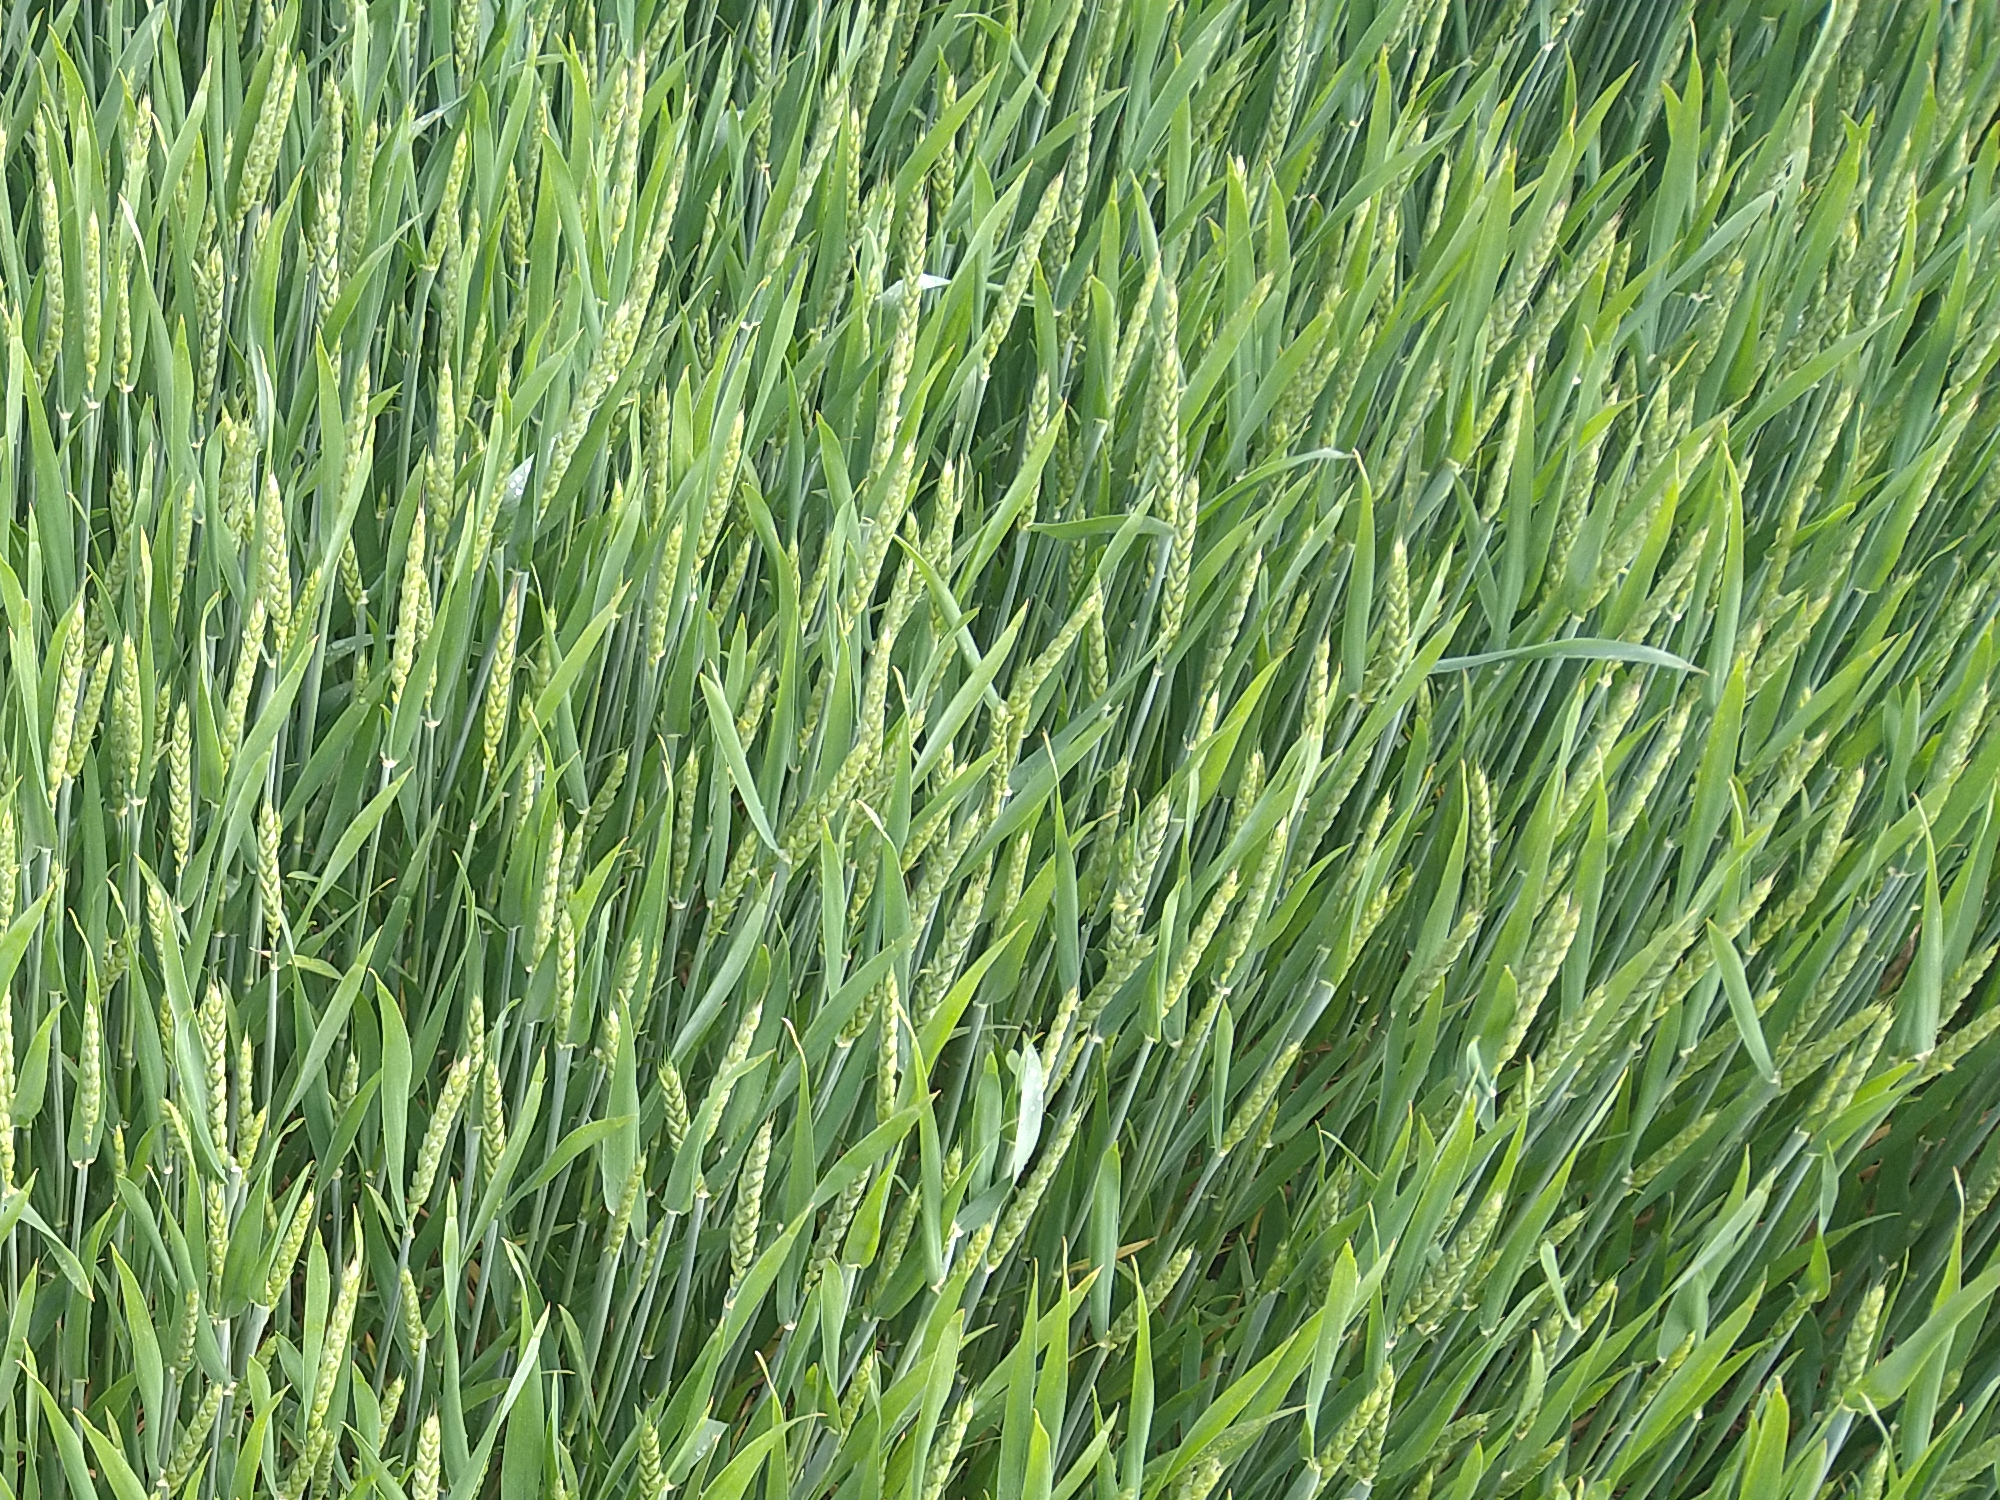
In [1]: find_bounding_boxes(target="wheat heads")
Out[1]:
[388,504,428,709]
[1061,497,1086,617]
[1091,762,1133,901]
[240,1112,272,1170]
[632,1210,670,1280]
[167,702,192,871]
[807,1156,874,1284]
[202,1166,219,1297]
[788,737,879,871]
[645,381,670,517]
[603,1007,622,1087]
[1207,819,1289,985]
[1425,158,1447,242]
[1347,1364,1392,1484]
[256,1189,276,1226]
[104,462,137,570]
[1543,1294,1562,1363]
[257,1,280,61]
[155,991,180,1074]
[1350,885,1389,957]
[1550,0,1582,35]
[695,1003,760,1138]
[1853,363,1925,479]
[1768,1281,1818,1347]
[832,1350,880,1445]
[338,365,368,500]
[1369,207,1398,323]
[1226,1042,1303,1144]
[163,477,197,622]
[635,1408,657,1500]
[1756,480,1807,602]
[0,1014,15,1173]
[0,708,11,778]
[1755,590,1801,631]
[876,333,910,474]
[1885,0,1931,64]
[841,112,860,248]
[430,368,460,546]
[0,804,16,926]
[1531,451,1597,604]
[797,535,840,632]
[79,1006,101,1144]
[1915,1433,2000,1500]
[1859,178,1916,321]
[657,1061,692,1154]
[1502,281,1556,381]
[1264,334,1322,424]
[198,241,227,405]
[1475,371,1526,450]
[844,445,912,628]
[469,469,505,564]
[964,31,984,158]
[918,473,955,634]
[1807,68,1861,184]
[1940,313,2000,414]
[128,94,152,165]
[1398,1190,1506,1324]
[641,526,681,658]
[590,70,623,172]
[646,0,680,69]
[1190,63,1237,140]
[1108,1243,1194,1351]
[1711,526,1730,604]
[1826,1013,1895,1122]
[1688,990,1777,1077]
[1465,1216,1581,1309]
[909,635,958,737]
[1660,570,1700,616]
[1153,346,1181,525]
[776,80,845,262]
[1489,198,1566,351]
[521,698,537,830]
[1502,897,1573,1012]
[67,646,115,772]
[1958,151,1970,218]
[175,154,199,221]
[314,1258,350,1418]
[1919,685,1989,804]
[1606,240,1632,303]
[994,1108,1080,1271]
[419,568,440,692]
[1801,393,1852,509]
[1110,793,1170,956]
[229,1,250,37]
[534,634,554,696]
[1410,680,1439,752]
[1036,987,1074,1074]
[1514,984,1603,1114]
[213,434,251,528]
[1555,688,1642,824]
[882,1,923,88]
[498,286,534,353]
[868,1184,919,1292]
[537,305,629,516]
[1714,22,1729,82]
[234,55,285,223]
[35,116,68,387]
[1777,0,1865,166]
[540,1470,578,1500]
[1049,411,1075,509]
[923,746,955,877]
[1596,352,1636,486]
[258,467,293,633]
[935,75,961,225]
[704,825,759,939]
[1163,990,1221,1098]
[1305,1373,1383,1462]
[111,1119,124,1188]
[165,1382,225,1487]
[975,174,1068,361]
[1967,76,2000,154]
[436,212,472,351]
[1523,1471,1562,1500]
[1550,215,1623,329]
[1374,354,1441,491]
[1116,257,1163,387]
[1507,913,1580,1054]
[1967,11,1983,83]
[401,1262,420,1359]
[864,0,888,123]
[527,87,549,244]
[225,1035,254,1151]
[1925,128,1959,260]
[1344,789,1389,906]
[1765,305,1801,357]
[260,802,291,950]
[409,1416,439,1500]
[1596,496,1665,576]
[47,598,85,797]
[1399,1413,1489,1468]
[285,1423,327,1500]
[798,652,833,761]
[482,1060,504,1200]
[732,668,770,749]
[991,197,1020,240]
[85,556,125,664]
[916,849,990,1021]
[1513,1388,1543,1435]
[482,593,513,744]
[1383,538,1416,678]
[1777,1008,1885,1074]
[1803,769,1861,900]
[407,0,427,70]
[260,63,299,217]
[1278,588,1313,658]
[1286,744,1373,903]
[1817,521,1867,602]
[460,204,478,288]
[1208,83,1244,154]
[284,562,321,664]
[1000,830,1031,938]
[919,1397,975,1500]
[1158,473,1199,664]
[161,1100,188,1173]
[607,1151,647,1248]
[839,710,923,836]
[1936,0,1987,95]
[605,55,646,222]
[1790,227,1887,363]
[668,751,701,895]
[272,1395,296,1437]
[697,306,711,369]
[1385,0,1427,45]
[1696,263,1744,365]
[1925,942,2000,1026]
[1588,925,1695,1050]
[1891,1007,2000,1084]
[639,942,659,1026]
[877,971,902,1124]
[196,981,226,1162]
[1310,333,1371,449]
[1644,382,1670,470]
[1705,125,1730,206]
[1096,0,1120,71]
[1029,602,1097,695]
[1043,0,1076,101]
[617,147,686,359]
[459,4,484,75]
[1624,1112,1723,1194]
[1631,1331,1695,1420]
[938,1144,962,1191]
[1612,697,1695,846]
[1820,215,1858,354]
[488,430,521,516]
[1467,767,1491,915]
[1304,1184,1343,1315]
[778,329,823,436]
[1574,1283,1613,1346]
[711,526,752,617]
[1252,0,1303,174]
[954,1217,992,1277]
[586,0,598,92]
[151,684,174,779]
[845,851,886,948]
[466,995,484,1090]
[217,412,264,539]
[832,984,880,1042]
[1017,375,1050,527]
[348,122,375,275]
[1196,539,1261,725]
[1960,462,2000,529]
[225,1337,275,1426]
[172,1294,202,1394]
[1743,743,1819,848]
[374,1378,406,1451]
[1483,381,1542,521]
[1290,156,1314,203]
[820,195,882,318]
[458,316,489,409]
[698,183,719,282]
[103,629,143,802]
[909,813,979,933]
[1658,405,1689,468]
[1466,0,1527,69]
[1407,0,1463,95]
[1289,351,1339,430]
[1867,136,1911,239]
[84,209,102,389]
[1331,197,1371,299]
[1846,0,1878,68]
[407,1058,461,1211]
[1851,1451,1886,1500]
[1137,280,1181,464]
[337,1058,356,1130]
[537,0,554,51]
[1303,637,1328,738]
[1407,915,1482,1016]
[264,1185,315,1305]
[102,925,115,997]
[0,979,13,1103]
[326,339,343,389]
[1609,529,1702,668]
[1173,166,1212,265]
[341,88,355,141]
[1647,29,1686,117]
[635,288,664,367]
[858,625,893,755]
[1759,896,1811,942]
[309,69,339,326]
[343,533,368,603]
[988,701,1005,819]
[112,257,137,381]
[1389,1192,1465,1266]
[1073,938,1154,1042]
[539,824,566,962]
[143,883,162,968]
[1656,879,1778,1014]
[1409,1267,1470,1332]
[1162,872,1237,1014]
[507,153,525,279]
[1080,605,1109,710]
[604,23,617,75]
[1917,590,1976,682]
[1835,1281,1883,1414]
[1956,1163,2000,1227]
[1799,1039,1872,1111]
[1240,750,1271,819]
[700,405,742,574]
[219,600,263,762]
[746,8,774,158]
[728,1116,775,1283]
[1060,69,1099,252]
[1386,119,1424,225]
[1744,602,1837,695]
[1787,924,1873,1044]
[549,913,578,1038]
[1260,421,1289,505]
[938,1233,956,1278]
[590,750,628,848]
[898,170,928,354]
[1491,1436,1565,1494]
[1006,673,1035,763]
[563,825,583,897]
[1130,1462,1220,1500]
[430,123,470,262]
[613,937,641,1012]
